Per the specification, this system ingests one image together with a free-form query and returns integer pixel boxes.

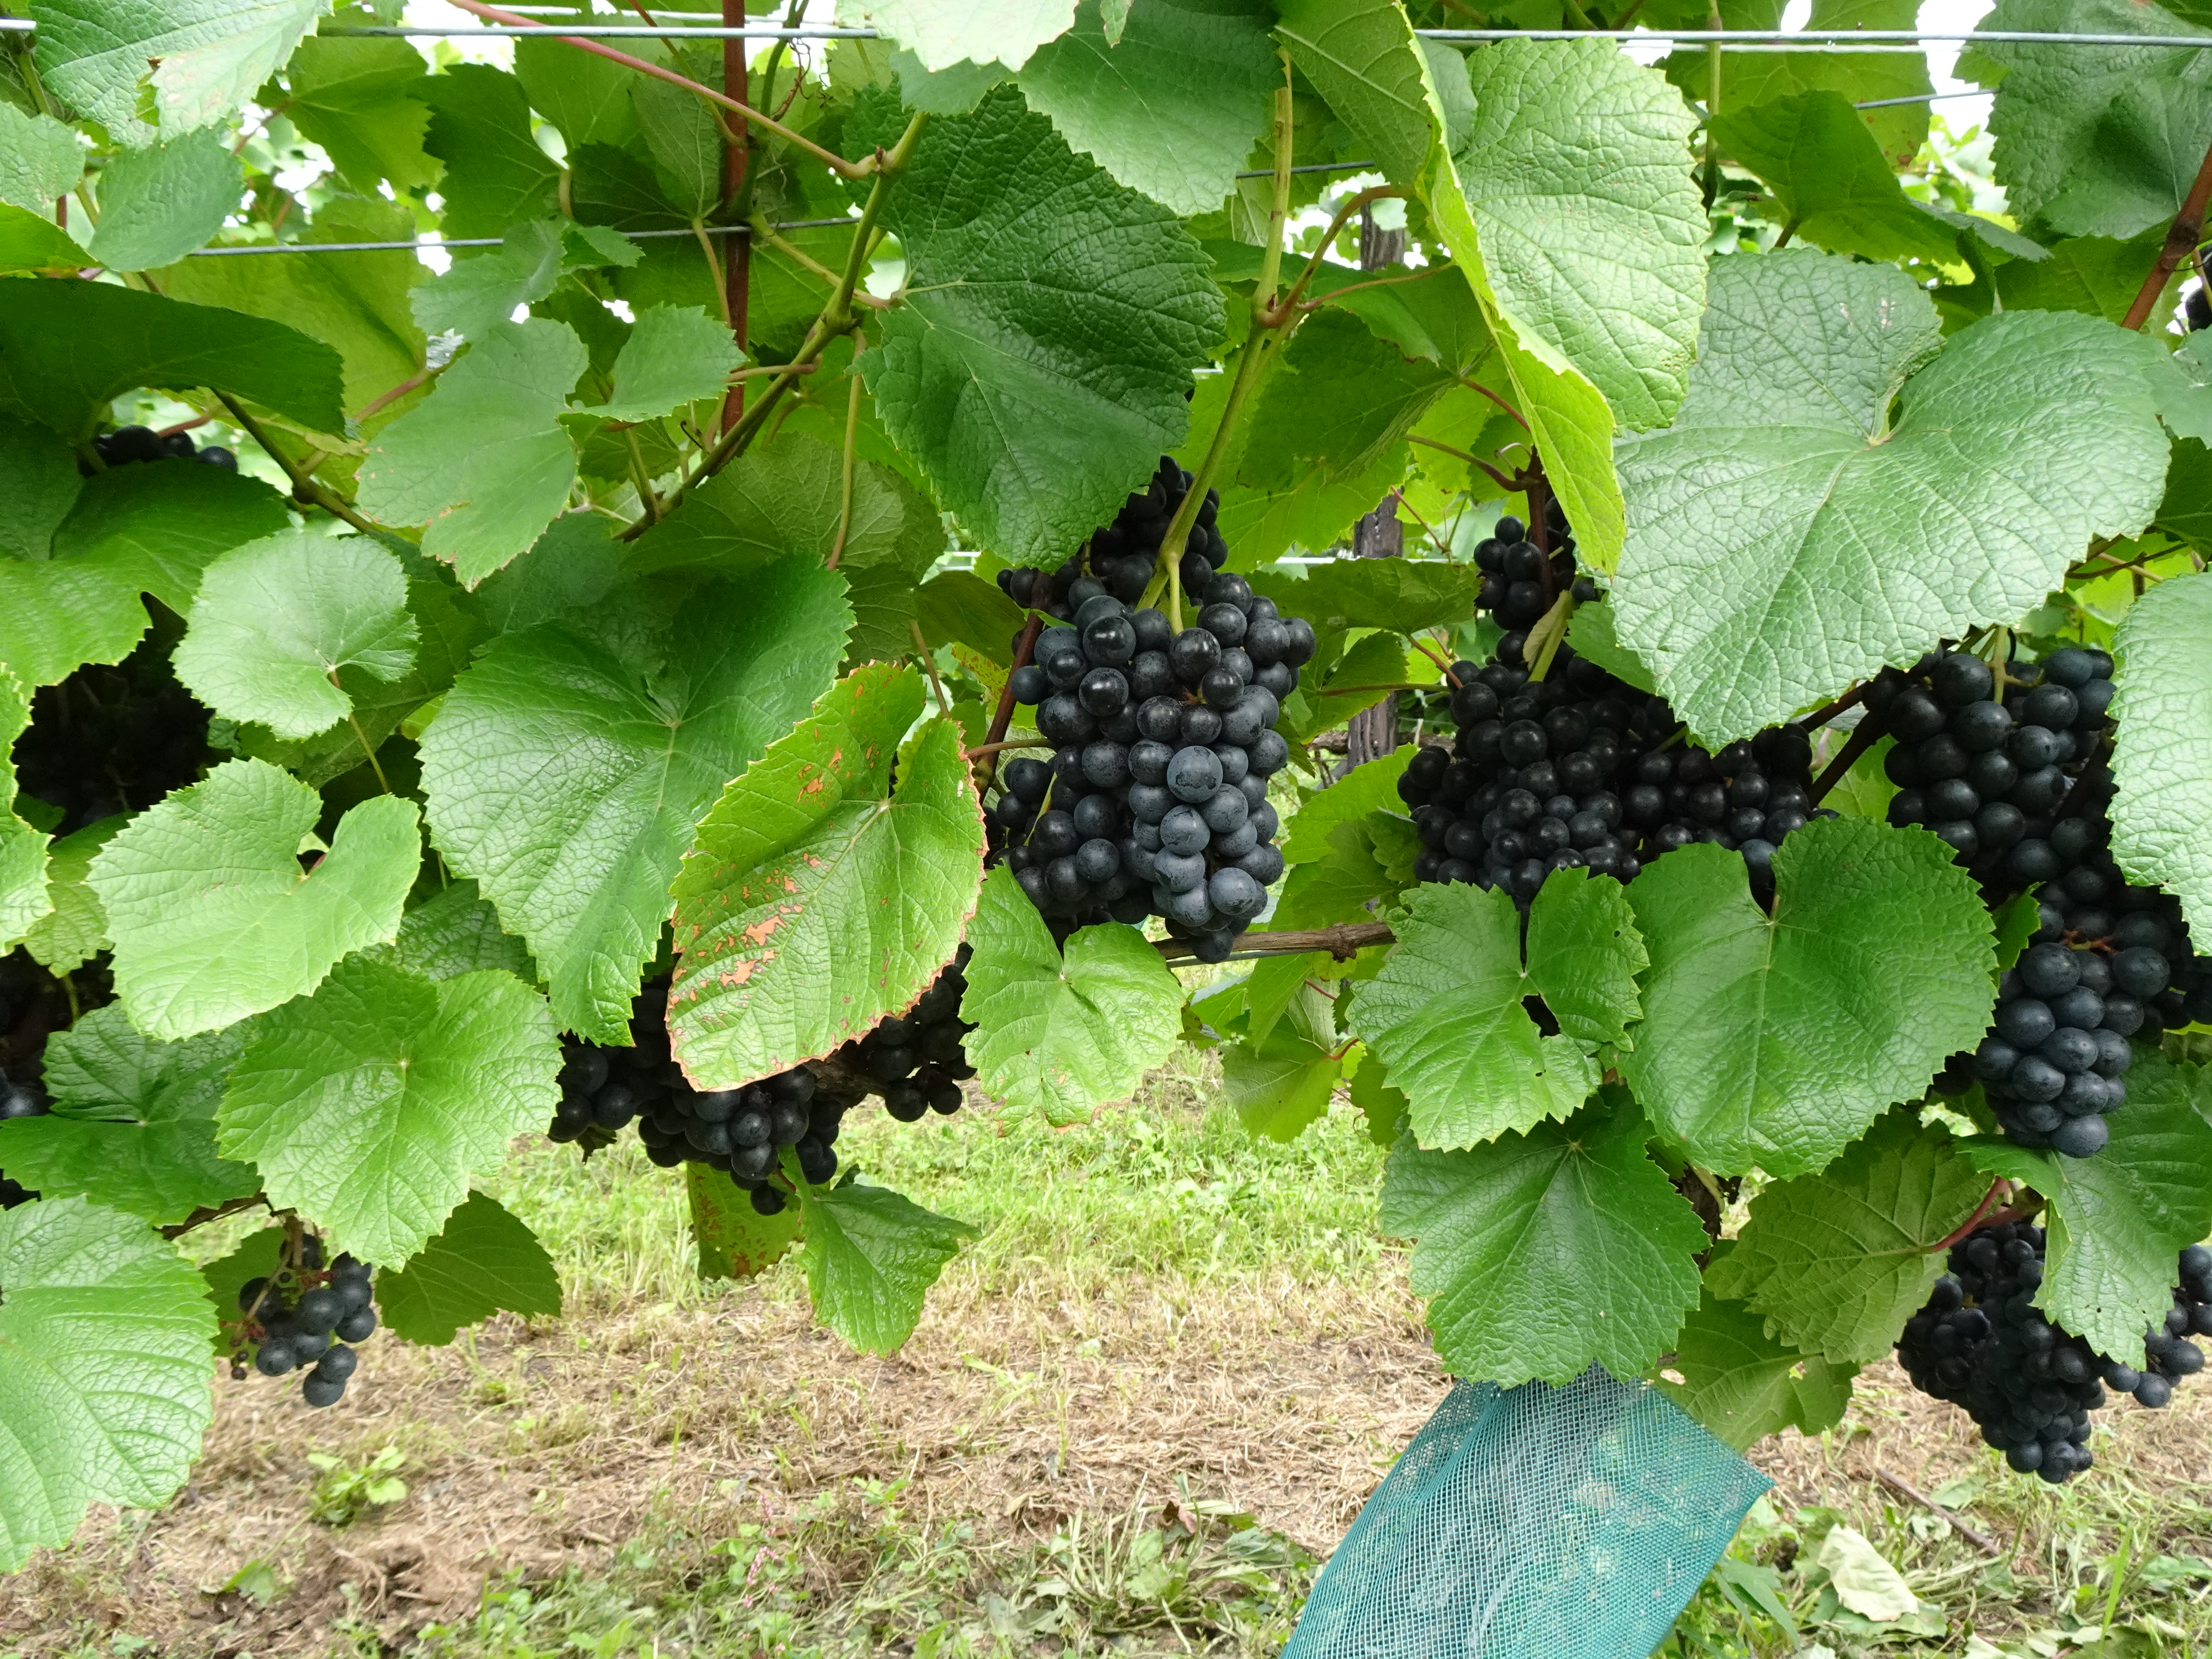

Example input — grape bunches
[997,456,1229,666]
[546,989,670,1149]
[15,590,208,836]
[1397,745,1494,893]
[2103,1245,2212,1407]
[230,1222,376,1407]
[2150,935,2212,1029]
[1948,1224,2105,1483]
[638,1064,843,1216]
[1862,641,2118,883]
[841,951,980,1122]
[3,943,121,1119]
[2186,242,2212,332]
[1892,1270,1990,1425]
[1010,553,1316,963]
[982,755,1153,945]
[1897,1055,1973,1114]
[1445,657,1647,961]
[1624,693,1839,916]
[75,425,237,480]
[1958,818,2190,1158]
[1474,485,1607,664]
